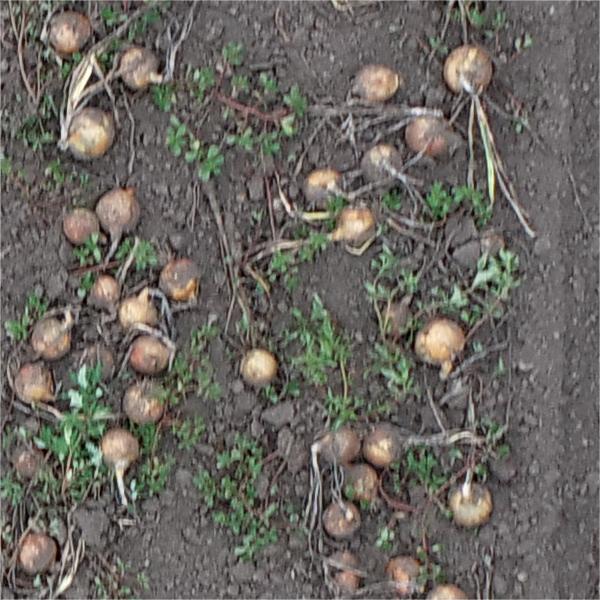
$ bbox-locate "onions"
[29,312,71,356]
[87,274,119,308]
[15,361,55,402]
[318,425,359,463]
[118,290,163,326]
[118,43,159,87]
[159,257,199,301]
[415,317,464,364]
[384,556,417,590]
[427,582,467,599]
[353,62,399,103]
[405,114,451,160]
[239,346,277,383]
[128,333,170,374]
[47,8,94,54]
[61,207,98,244]
[14,532,55,576]
[333,202,373,244]
[122,382,167,421]
[324,499,359,536]
[443,46,494,92]
[95,187,138,242]
[343,464,378,501]
[324,557,361,594]
[449,479,491,523]
[363,142,400,182]
[83,345,116,381]
[65,106,113,156]
[360,424,400,466]
[304,166,341,194]
[97,427,138,474]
